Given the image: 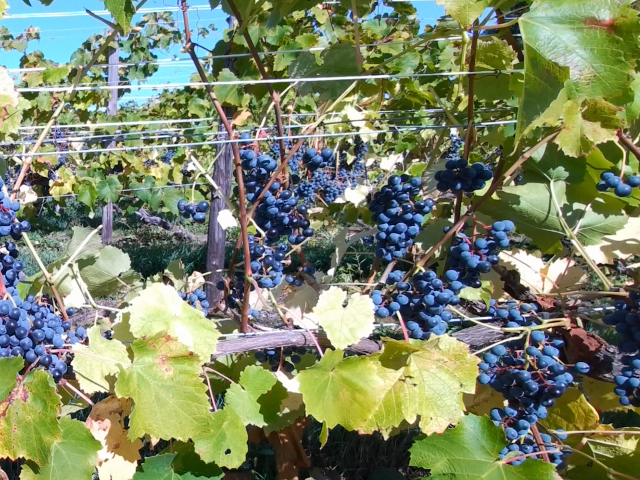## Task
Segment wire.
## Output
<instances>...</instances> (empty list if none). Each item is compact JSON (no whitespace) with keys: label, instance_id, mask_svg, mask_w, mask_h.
<instances>
[{"label":"wire","instance_id":"a73af890","mask_svg":"<svg viewBox=\"0 0 640 480\" xmlns=\"http://www.w3.org/2000/svg\"><path fill=\"white\" fill-rule=\"evenodd\" d=\"M467 123H439L429 124L422 126H411L402 128H390V129H362L353 131H334L327 133H309L301 135H280V136H268V137H247V138H223L218 141H205V142H191L185 144H165V145H140L128 148H90L86 150H69V151H53V152H29V153H3L0 154V159L5 158H31V157H55V156H71V155H88L92 153H130L142 150H167V149H187L193 147H207V146H220L225 143L238 144V143H250V142H270V141H282V140H303V139H319L329 138L337 136H355L364 134H392V133H404L413 131H425L441 128H462L466 127Z\"/></svg>","mask_w":640,"mask_h":480},{"label":"wire","instance_id":"4f2155b8","mask_svg":"<svg viewBox=\"0 0 640 480\" xmlns=\"http://www.w3.org/2000/svg\"><path fill=\"white\" fill-rule=\"evenodd\" d=\"M323 331V328H314V329H288V330H280V331H266V332H248V333H235V334H221V337H238V336H246V335H261V334H278V333H291V332H317Z\"/></svg>","mask_w":640,"mask_h":480},{"label":"wire","instance_id":"d2f4af69","mask_svg":"<svg viewBox=\"0 0 640 480\" xmlns=\"http://www.w3.org/2000/svg\"><path fill=\"white\" fill-rule=\"evenodd\" d=\"M524 68L521 69H493V70H474V69H452L449 71L433 72L425 71L424 73H401L396 75H367V74H351L341 77H294V78H258L245 81H207V82H189V83H155V84H116L98 87H38V88H21L17 87L18 93H86L100 92L107 90H133V89H157V88H191V87H210V86H247L260 83H296V82H343L354 79L364 80H398L403 78H428L444 77L454 74H472V75H495V74H523Z\"/></svg>","mask_w":640,"mask_h":480}]
</instances>
